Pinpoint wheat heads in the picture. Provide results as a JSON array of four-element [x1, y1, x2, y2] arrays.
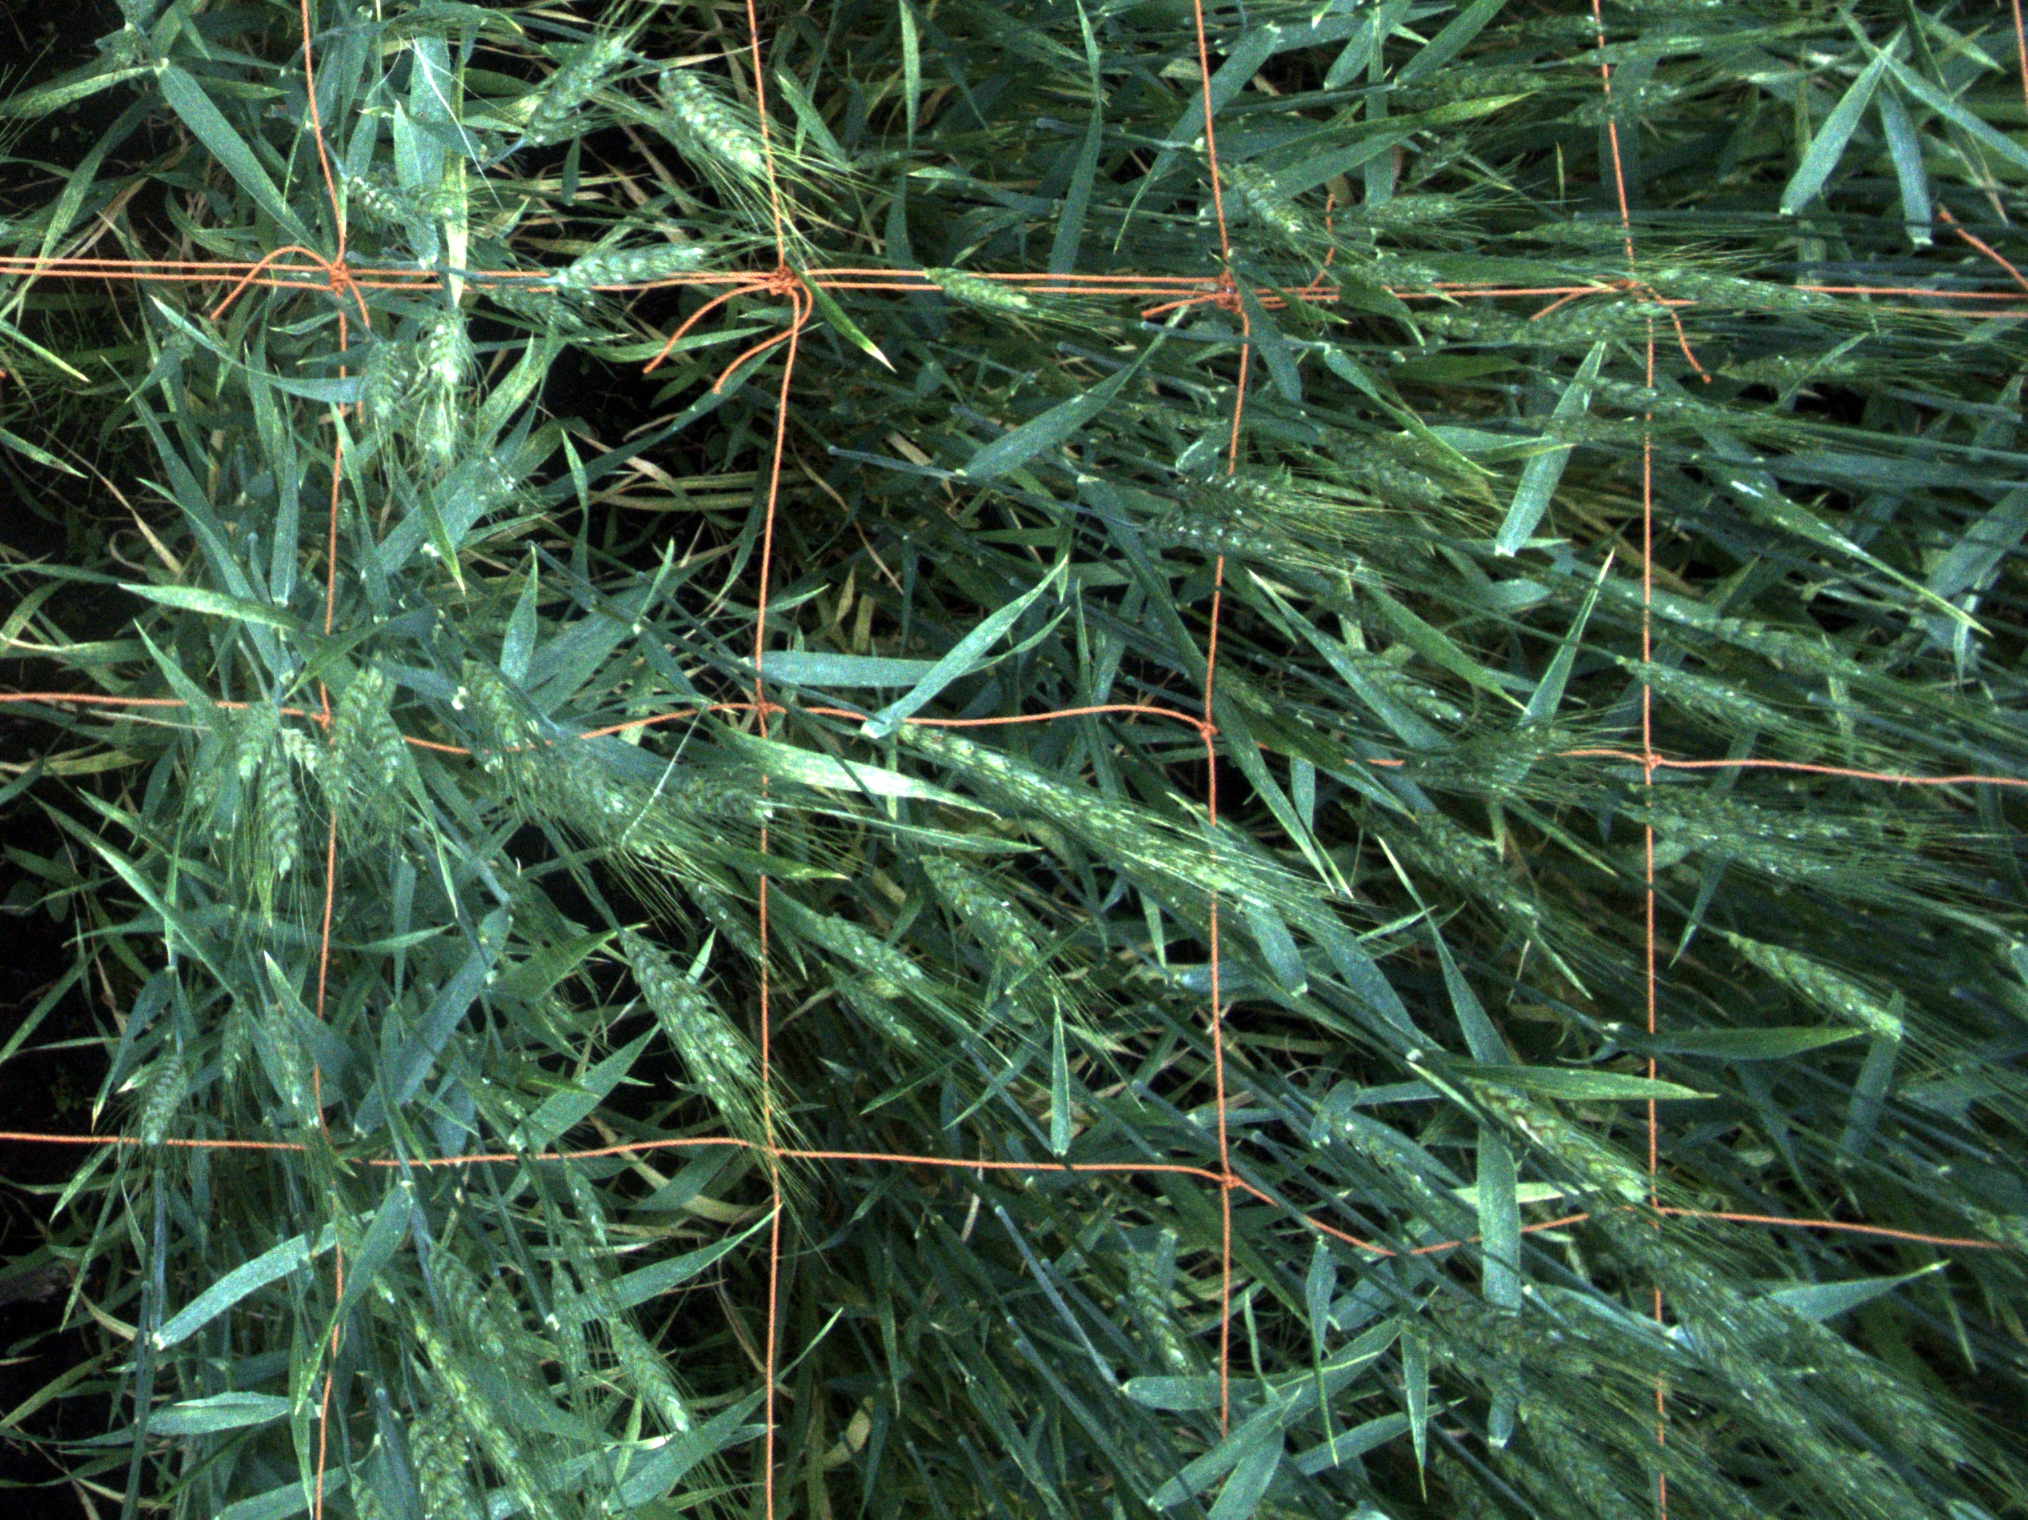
[[424, 1332, 557, 1520], [653, 771, 784, 824], [1764, 1301, 1961, 1468], [543, 1202, 614, 1310], [1633, 810, 1825, 890], [1512, 298, 1669, 349], [1196, 650, 1276, 712], [609, 1314, 693, 1433], [419, 1232, 507, 1358], [221, 1003, 251, 1082], [1227, 168, 1280, 226], [1586, 1188, 1724, 1296], [1614, 650, 1795, 746], [1336, 259, 1444, 294], [1524, 217, 1636, 248], [481, 281, 589, 338], [1524, 1393, 1633, 1515], [1438, 1451, 1499, 1520], [494, 1274, 530, 1381], [362, 330, 404, 424], [1727, 925, 1900, 1038], [677, 866, 761, 959], [532, 725, 640, 829], [1668, 1292, 1863, 1512], [1395, 131, 1473, 188], [801, 909, 922, 983], [1139, 513, 1280, 563], [1501, 723, 1576, 747], [1656, 603, 1837, 681], [1651, 782, 1844, 843], [515, 27, 632, 150], [1342, 649, 1466, 731], [1710, 352, 1856, 389], [1393, 64, 1543, 111], [285, 723, 327, 776], [397, 20, 453, 39], [923, 268, 1031, 320], [180, 752, 224, 812], [413, 385, 468, 469], [366, 709, 402, 786], [1181, 466, 1300, 519], [402, 173, 465, 221], [348, 1482, 384, 1520], [911, 854, 1042, 971], [1529, 1280, 1677, 1381], [502, 963, 580, 1026], [260, 745, 307, 881], [892, 721, 1139, 854], [1124, 1237, 1187, 1382], [1316, 426, 1446, 506], [340, 175, 406, 226], [1336, 192, 1468, 230], [461, 652, 527, 758], [1564, 37, 1708, 70], [1567, 84, 1682, 138], [636, 978, 733, 1109], [157, 326, 197, 361], [406, 1416, 459, 1520], [1241, 151, 1281, 188], [430, 1413, 477, 1511], [326, 670, 371, 809], [1338, 795, 1470, 901], [1590, 377, 1783, 439], [269, 1007, 307, 1105], [1395, 301, 1514, 351], [421, 309, 465, 394], [563, 1155, 611, 1243], [624, 923, 755, 1069], [549, 1257, 596, 1391], [820, 966, 917, 1053], [1656, 267, 1820, 316], [225, 692, 267, 760], [448, 1064, 528, 1122], [549, 234, 709, 294], [1506, 1449, 1578, 1520], [1607, 0, 1722, 25], [1311, 1100, 1473, 1243], [1428, 1294, 1531, 1367], [139, 1049, 192, 1142], [1492, 11, 1590, 41], [662, 62, 770, 173], [1442, 760, 1521, 806], [324, 1198, 394, 1310], [1461, 1075, 1640, 1191], [850, 145, 899, 175], [1417, 806, 1521, 914], [1961, 1200, 2023, 1249]]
